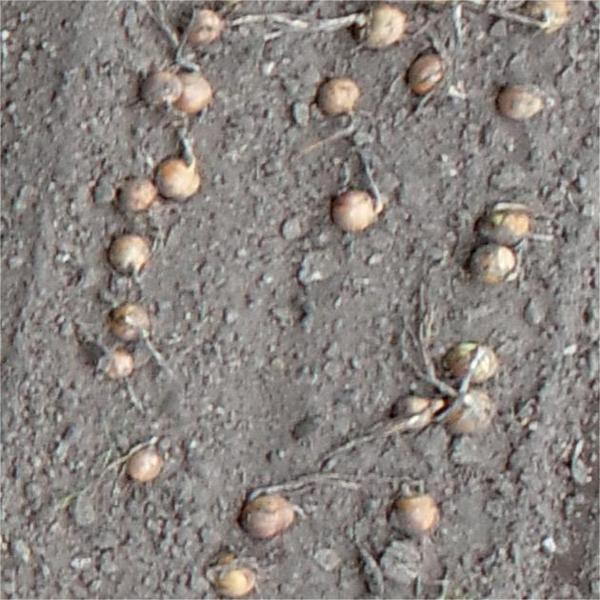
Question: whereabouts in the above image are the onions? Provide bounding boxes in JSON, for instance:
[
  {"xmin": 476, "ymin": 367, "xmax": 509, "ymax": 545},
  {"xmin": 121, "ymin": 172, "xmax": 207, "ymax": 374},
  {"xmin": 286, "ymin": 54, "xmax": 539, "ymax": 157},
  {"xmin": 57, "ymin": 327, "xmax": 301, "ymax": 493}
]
[
  {"xmin": 472, "ymin": 245, "xmax": 515, "ymax": 284},
  {"xmin": 215, "ymin": 565, "xmax": 254, "ymax": 596},
  {"xmin": 499, "ymin": 84, "xmax": 547, "ymax": 121},
  {"xmin": 107, "ymin": 234, "xmax": 147, "ymax": 272},
  {"xmin": 361, "ymin": 6, "xmax": 404, "ymax": 47},
  {"xmin": 124, "ymin": 445, "xmax": 161, "ymax": 482},
  {"xmin": 530, "ymin": 0, "xmax": 568, "ymax": 30},
  {"xmin": 405, "ymin": 51, "xmax": 444, "ymax": 94},
  {"xmin": 173, "ymin": 76, "xmax": 213, "ymax": 114},
  {"xmin": 185, "ymin": 8, "xmax": 222, "ymax": 45},
  {"xmin": 146, "ymin": 69, "xmax": 183, "ymax": 105},
  {"xmin": 391, "ymin": 491, "xmax": 437, "ymax": 535},
  {"xmin": 443, "ymin": 342, "xmax": 496, "ymax": 384},
  {"xmin": 123, "ymin": 176, "xmax": 158, "ymax": 214},
  {"xmin": 443, "ymin": 390, "xmax": 489, "ymax": 436},
  {"xmin": 104, "ymin": 349, "xmax": 134, "ymax": 377},
  {"xmin": 155, "ymin": 156, "xmax": 196, "ymax": 198},
  {"xmin": 486, "ymin": 204, "xmax": 529, "ymax": 246},
  {"xmin": 390, "ymin": 391, "xmax": 433, "ymax": 432},
  {"xmin": 108, "ymin": 302, "xmax": 146, "ymax": 340},
  {"xmin": 315, "ymin": 77, "xmax": 359, "ymax": 115},
  {"xmin": 331, "ymin": 187, "xmax": 377, "ymax": 231},
  {"xmin": 241, "ymin": 491, "xmax": 292, "ymax": 539}
]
